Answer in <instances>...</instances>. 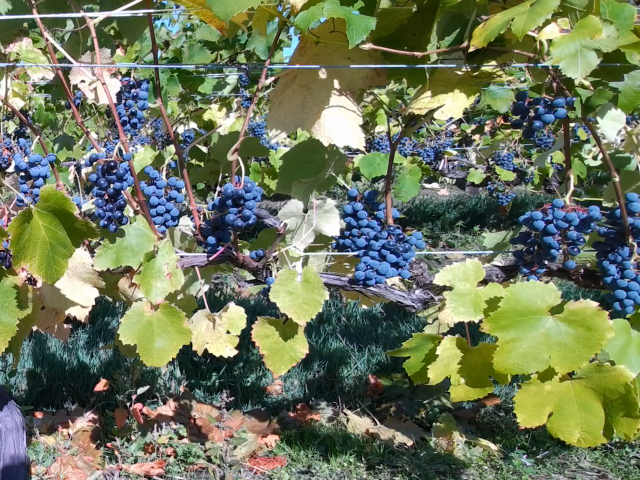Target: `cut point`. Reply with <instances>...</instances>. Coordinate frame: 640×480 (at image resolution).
<instances>
[{"label": "cut point", "instance_id": "cut-point-1", "mask_svg": "<svg viewBox=\"0 0 640 480\" xmlns=\"http://www.w3.org/2000/svg\"><path fill=\"white\" fill-rule=\"evenodd\" d=\"M628 241H629L630 244H632L634 246L633 247V255L631 257V261H634L636 259V257H637V253H636L637 244L632 240L631 235H628Z\"/></svg>", "mask_w": 640, "mask_h": 480}, {"label": "cut point", "instance_id": "cut-point-2", "mask_svg": "<svg viewBox=\"0 0 640 480\" xmlns=\"http://www.w3.org/2000/svg\"><path fill=\"white\" fill-rule=\"evenodd\" d=\"M175 155H176V152H175V151H173V152H172V154H171V155H169V156L164 160L163 165H162V173H165V172H166V169H167V165H166V164L168 163V161H170L172 158H174V156H175Z\"/></svg>", "mask_w": 640, "mask_h": 480}, {"label": "cut point", "instance_id": "cut-point-3", "mask_svg": "<svg viewBox=\"0 0 640 480\" xmlns=\"http://www.w3.org/2000/svg\"><path fill=\"white\" fill-rule=\"evenodd\" d=\"M570 180H571V189H570V191H569V192H567V193H566V198H568V195H569V194H572L573 189H574V187H575V183H574V182H575V175H574V174H571V175H570Z\"/></svg>", "mask_w": 640, "mask_h": 480}, {"label": "cut point", "instance_id": "cut-point-4", "mask_svg": "<svg viewBox=\"0 0 640 480\" xmlns=\"http://www.w3.org/2000/svg\"><path fill=\"white\" fill-rule=\"evenodd\" d=\"M551 76L548 74L547 79H545L543 81V86H542V91H545V88L547 87L549 81H550Z\"/></svg>", "mask_w": 640, "mask_h": 480}, {"label": "cut point", "instance_id": "cut-point-5", "mask_svg": "<svg viewBox=\"0 0 640 480\" xmlns=\"http://www.w3.org/2000/svg\"><path fill=\"white\" fill-rule=\"evenodd\" d=\"M37 141H38V137H37V136H35V138H34V140H33L32 144H31V150H34V147H35V145H36Z\"/></svg>", "mask_w": 640, "mask_h": 480}]
</instances>
